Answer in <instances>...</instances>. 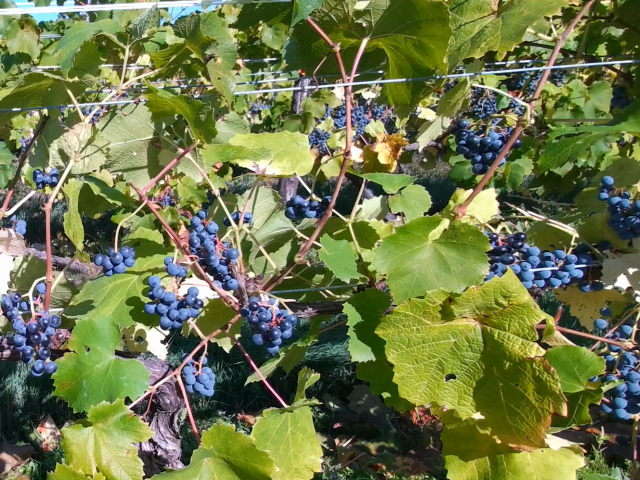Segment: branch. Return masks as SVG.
Masks as SVG:
<instances>
[{
	"instance_id": "branch-1",
	"label": "branch",
	"mask_w": 640,
	"mask_h": 480,
	"mask_svg": "<svg viewBox=\"0 0 640 480\" xmlns=\"http://www.w3.org/2000/svg\"><path fill=\"white\" fill-rule=\"evenodd\" d=\"M343 92L345 94V133H344V140H345V144H346V152H345V158H344L342 167L340 168V172H339L338 177H337L335 190L330 196L329 203H328V205H327V207H326V209L324 211V215H323L322 219L320 220V223H319L317 229L315 230V232L313 233L312 237L300 248V250L294 256V258L283 269V272L280 274V276L277 277L274 281L269 283L264 288V291L266 293H270L273 289L277 288L280 284H282L284 282V280L288 277V275L290 274L292 269H294L296 267V265L298 264V262L303 258L305 253L318 241V239L320 238L321 234L323 233L325 227L327 226V223L329 222V219L331 217L333 209L336 206L337 199L341 195V192L343 190L344 179H345V176L347 174V170L349 169V166L351 164L352 154H353V141H352V138H351V134H352V92L348 87H345L343 89Z\"/></svg>"
},
{
	"instance_id": "branch-2",
	"label": "branch",
	"mask_w": 640,
	"mask_h": 480,
	"mask_svg": "<svg viewBox=\"0 0 640 480\" xmlns=\"http://www.w3.org/2000/svg\"><path fill=\"white\" fill-rule=\"evenodd\" d=\"M551 74V71H543V74L540 78V81L537 85L534 95L531 98V101L524 109L519 122L516 124L515 131L510 135L507 143L501 149L500 153L494 160V162L490 165V167L486 170L482 180L476 185V187L472 190V192L467 196V198L463 201V203L458 207L457 211L454 214V218L459 220L462 217L464 211L468 208V206L472 203V201L479 195L481 190L489 183L490 178L492 177L494 171L500 166L501 162L504 160L505 156L508 154L510 149L513 147L516 139L522 135V130L526 121L528 120L531 112L538 104V101L542 95V92L545 88V85L548 81V78Z\"/></svg>"
},
{
	"instance_id": "branch-3",
	"label": "branch",
	"mask_w": 640,
	"mask_h": 480,
	"mask_svg": "<svg viewBox=\"0 0 640 480\" xmlns=\"http://www.w3.org/2000/svg\"><path fill=\"white\" fill-rule=\"evenodd\" d=\"M130 186L132 188V190L138 195L139 198L142 199V201L145 203V205L147 206V208L149 209V211L151 212L152 216L159 222L162 224V228L164 233L169 236L171 239H173L176 244L178 246H180L184 253L186 254V256L188 258H190L193 262V264L195 265L196 270L201 274L202 278L204 279V281L208 284V286L217 294L219 295L225 302L229 303L235 310L239 309V305L232 299L229 298L226 294H224L209 278V276L206 274V272L204 271V269L201 267L198 259L196 258L195 255H193L189 248L187 247V245L178 237L176 230L172 227V225L167 222L164 218L160 217L158 215V213L156 212V210L154 209V207L152 206V204L150 203V200L143 194L142 191L139 190V188L136 186V183L134 181L130 182Z\"/></svg>"
},
{
	"instance_id": "branch-4",
	"label": "branch",
	"mask_w": 640,
	"mask_h": 480,
	"mask_svg": "<svg viewBox=\"0 0 640 480\" xmlns=\"http://www.w3.org/2000/svg\"><path fill=\"white\" fill-rule=\"evenodd\" d=\"M52 229V203L47 201L45 203V226H44V244L46 249V265H45V278H46V286L43 295V309L47 311L50 308V298L53 289V275H52V267L54 263V234L51 232Z\"/></svg>"
},
{
	"instance_id": "branch-5",
	"label": "branch",
	"mask_w": 640,
	"mask_h": 480,
	"mask_svg": "<svg viewBox=\"0 0 640 480\" xmlns=\"http://www.w3.org/2000/svg\"><path fill=\"white\" fill-rule=\"evenodd\" d=\"M49 122H50V117L48 115H45L43 117V119H42L41 124L35 130V132L31 136V138L29 139L27 145L22 150V153L20 155L19 161L17 163V167H16V170H15L14 178L12 179V181L10 182V184L8 186L6 197H5L4 202L2 203V205L0 207V217H3L5 215V212L7 211L8 207L11 204V201H12L14 193H15V188L17 187V185L21 181V176H22V173H23L24 165H25L26 160L28 158V154L31 152V150L35 146V144H36L37 140L39 139V137L41 136V134L48 127Z\"/></svg>"
},
{
	"instance_id": "branch-6",
	"label": "branch",
	"mask_w": 640,
	"mask_h": 480,
	"mask_svg": "<svg viewBox=\"0 0 640 480\" xmlns=\"http://www.w3.org/2000/svg\"><path fill=\"white\" fill-rule=\"evenodd\" d=\"M186 158L191 162V164L200 173V175L205 178L206 183L209 185V187L212 189L213 193L215 194V197L217 198V201L220 204L221 210L225 214V216H226V218H227V220H228V222L230 224V228H231V231L233 233V244L240 251V255L237 256V260H238L237 261V267H238L239 273L243 274L244 273L243 257H242V251L240 249V238H239L238 228L235 226V221L232 218L229 210L227 209V207L225 205V201L222 199V196H221L219 190L217 189L216 185L211 180L210 176L197 163V161L195 160V158L192 155L187 154Z\"/></svg>"
},
{
	"instance_id": "branch-7",
	"label": "branch",
	"mask_w": 640,
	"mask_h": 480,
	"mask_svg": "<svg viewBox=\"0 0 640 480\" xmlns=\"http://www.w3.org/2000/svg\"><path fill=\"white\" fill-rule=\"evenodd\" d=\"M595 3H596V0H588L587 3L585 4V6L583 7V9L581 11L577 12L571 18L570 22L566 25V27L560 33L559 37L557 38V40L554 43L553 48H552V50L550 52V58L547 61V64L549 66H553L556 63L557 54H558V52L560 50L561 45L563 44L564 40L566 39L567 35L576 26L578 21L581 18H583L584 16H586L590 12V9L593 7V5Z\"/></svg>"
},
{
	"instance_id": "branch-8",
	"label": "branch",
	"mask_w": 640,
	"mask_h": 480,
	"mask_svg": "<svg viewBox=\"0 0 640 480\" xmlns=\"http://www.w3.org/2000/svg\"><path fill=\"white\" fill-rule=\"evenodd\" d=\"M306 21L318 36H320L322 39H324L330 44L333 53L336 55V58L338 60V64L342 73L340 75V78L342 79L343 82L349 81L348 67L345 62V57L341 52V50L339 49V45L337 44V41L331 35L327 34L323 29H321L311 16H308L306 18Z\"/></svg>"
},
{
	"instance_id": "branch-9",
	"label": "branch",
	"mask_w": 640,
	"mask_h": 480,
	"mask_svg": "<svg viewBox=\"0 0 640 480\" xmlns=\"http://www.w3.org/2000/svg\"><path fill=\"white\" fill-rule=\"evenodd\" d=\"M242 317L241 313H237L235 314L227 323H225L223 326H220L219 328H217L215 331L211 332L209 335L203 337L198 344L191 349L187 355L185 356L184 359H182L179 364L176 366L174 373L175 374H179L180 370L183 368V366L189 362L190 358L197 352L199 351L203 345L207 342L210 341L211 339H213L214 337L218 336L220 333H222L223 331H225L226 329L230 328L236 321L237 319H240Z\"/></svg>"
}]
</instances>
